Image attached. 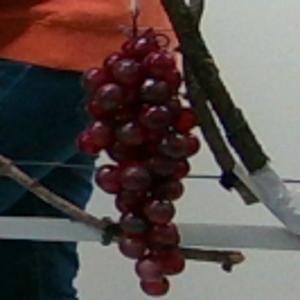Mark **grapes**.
<instances>
[{
    "mask_svg": "<svg viewBox=\"0 0 300 300\" xmlns=\"http://www.w3.org/2000/svg\"><path fill=\"white\" fill-rule=\"evenodd\" d=\"M173 51L151 34L126 39L105 54L102 66L87 70L84 83L94 97L86 106L96 122L82 134L83 154L105 151L111 162L95 168L94 183L115 196L120 231L118 249L136 260L134 271L143 293L153 297L171 290L168 276L186 265L174 201L185 192L192 170L188 158L200 141L190 132L199 121L195 107L182 104L183 77Z\"/></svg>",
    "mask_w": 300,
    "mask_h": 300,
    "instance_id": "obj_1",
    "label": "grapes"
}]
</instances>
